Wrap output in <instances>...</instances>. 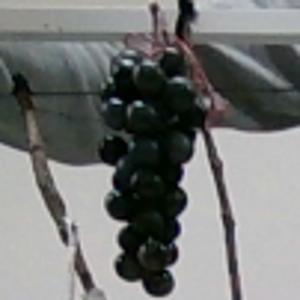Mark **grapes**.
<instances>
[{
	"mask_svg": "<svg viewBox=\"0 0 300 300\" xmlns=\"http://www.w3.org/2000/svg\"><path fill=\"white\" fill-rule=\"evenodd\" d=\"M109 76L99 88L100 118L131 138L128 143L111 134L97 145L100 162L116 169L114 189L103 199L105 213L128 224L118 232L123 252L113 268L121 280L140 281L147 294L162 298L176 287L167 266L179 259L178 217L188 206L187 191L178 185L185 176L182 164L193 156L197 128L210 108L178 44H164L152 55L124 47L110 61Z\"/></svg>",
	"mask_w": 300,
	"mask_h": 300,
	"instance_id": "1",
	"label": "grapes"
}]
</instances>
